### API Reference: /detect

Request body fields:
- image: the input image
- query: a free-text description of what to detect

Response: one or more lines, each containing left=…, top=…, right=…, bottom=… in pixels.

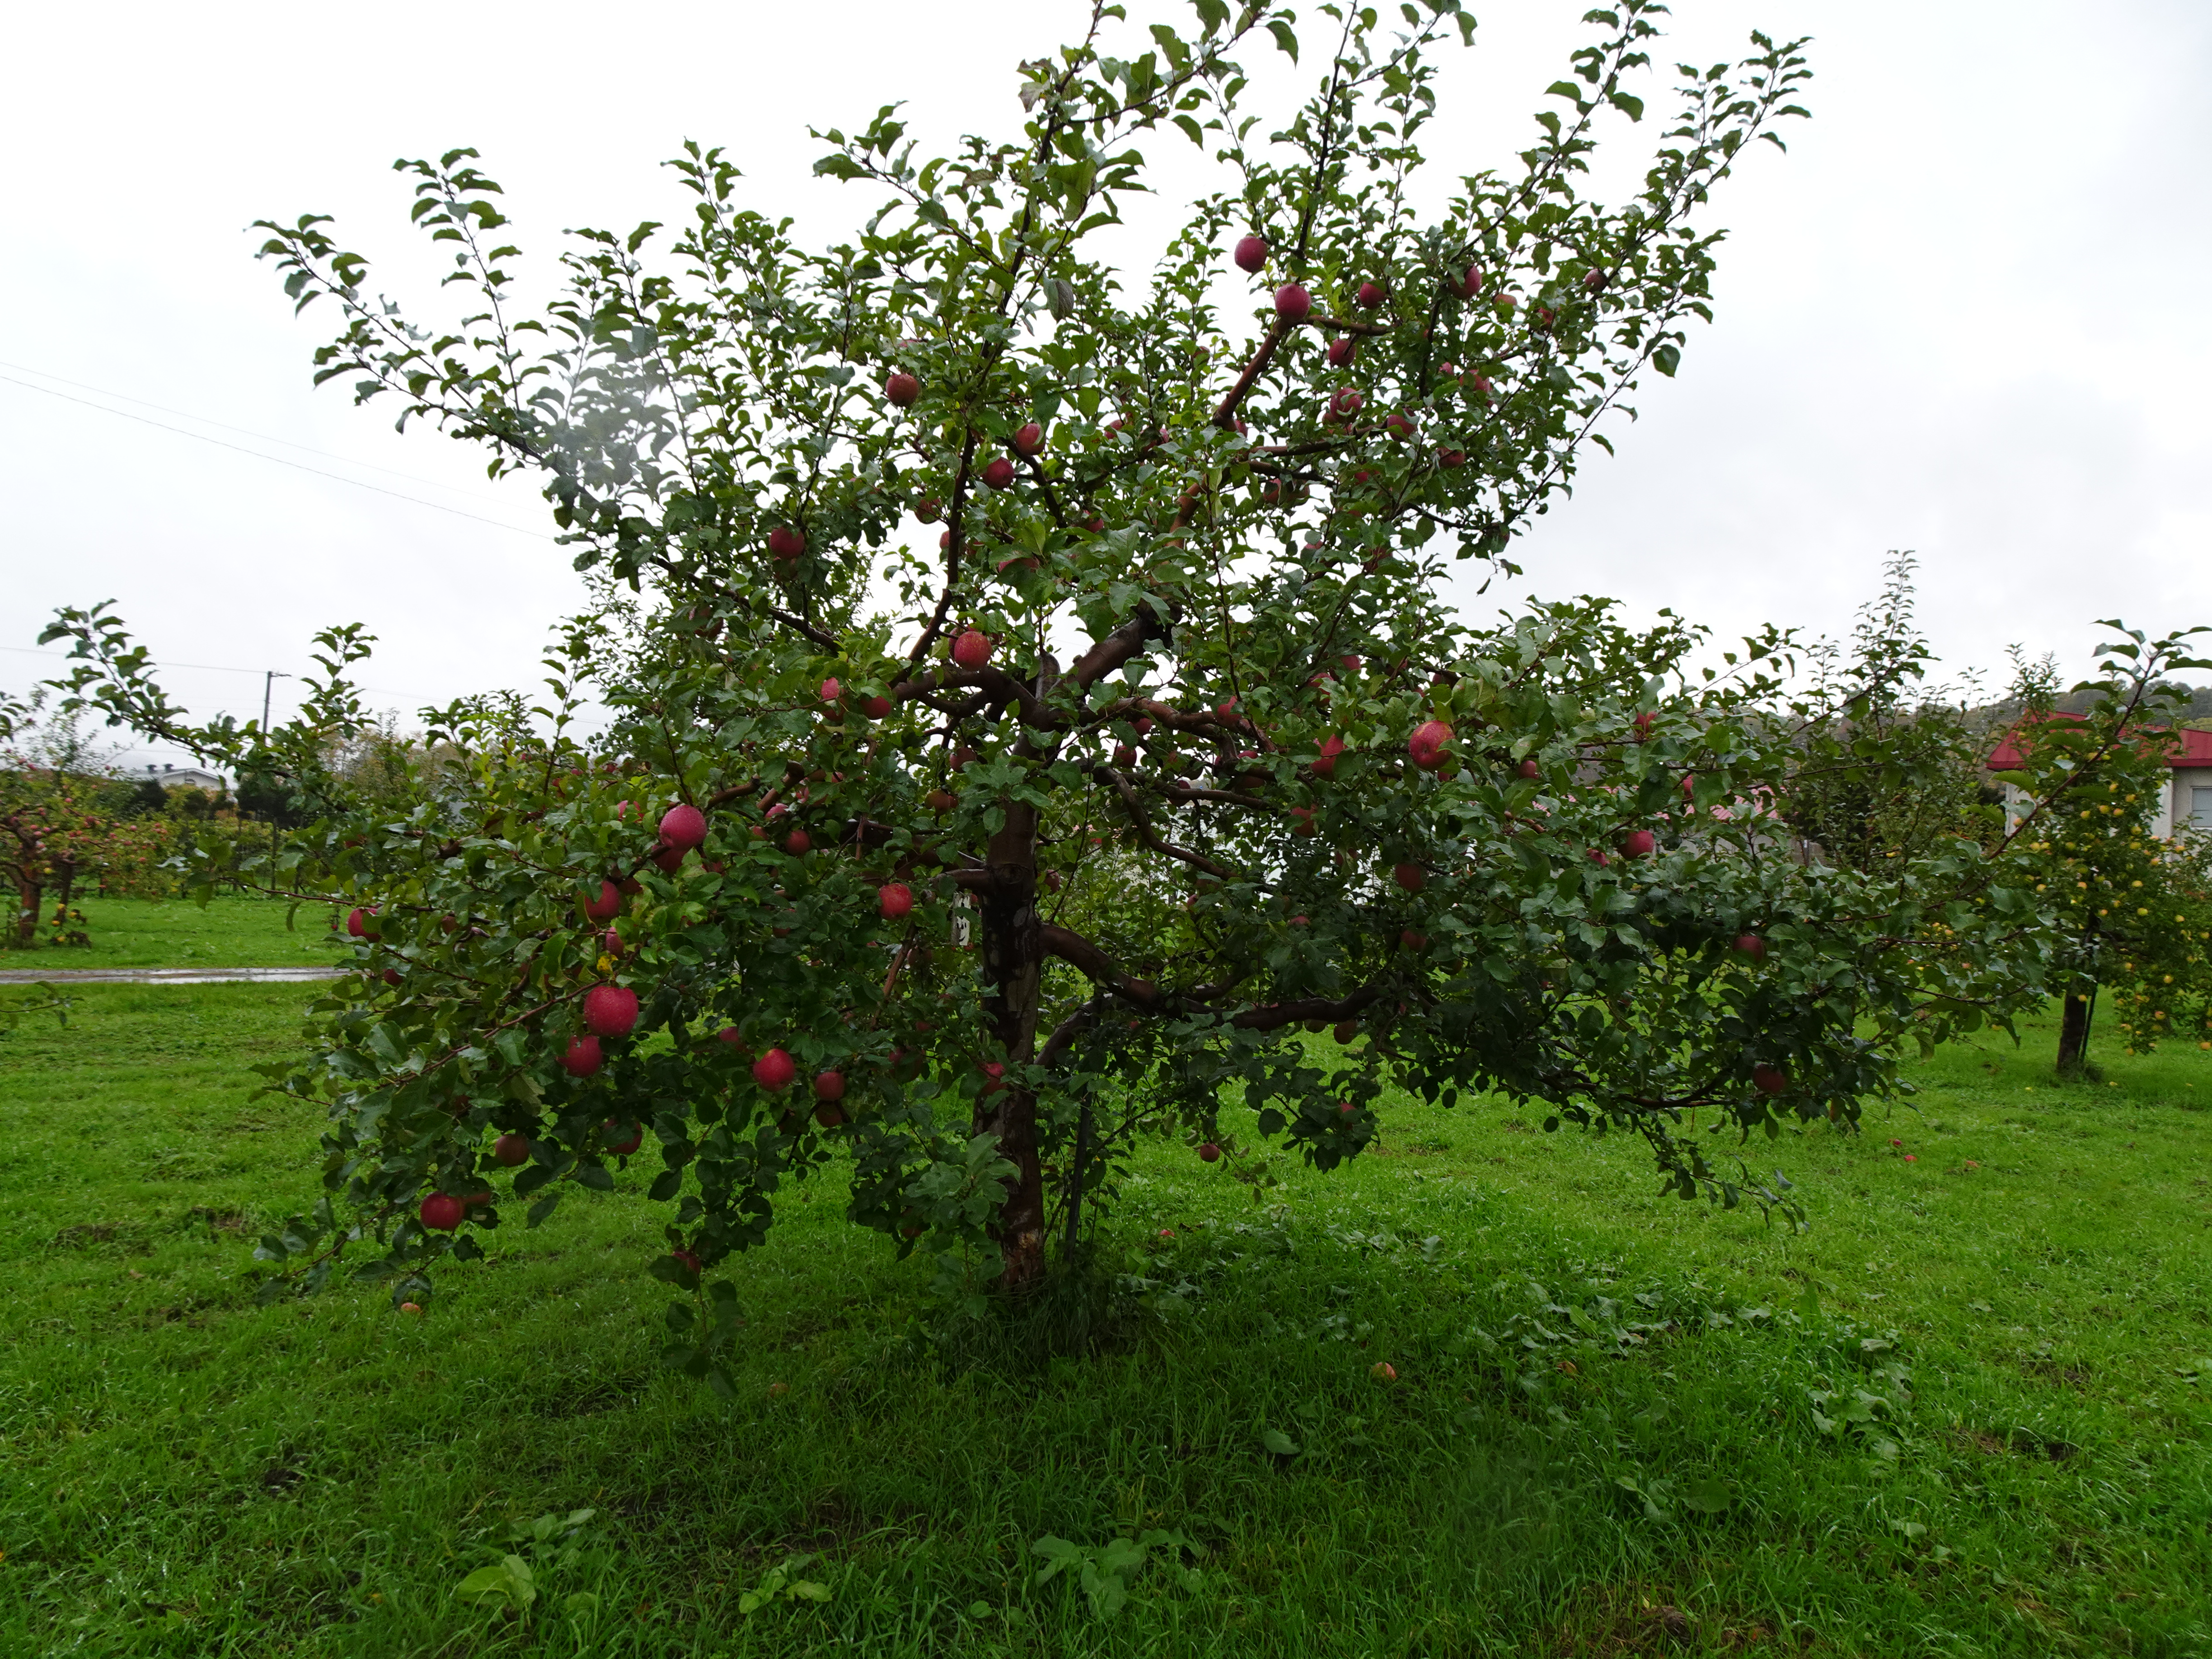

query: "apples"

left=1634, top=711, right=1658, bottom=734
left=1177, top=730, right=1199, bottom=748
left=700, top=851, right=723, bottom=873
left=1292, top=803, right=1318, bottom=838
left=1167, top=752, right=1183, bottom=772
left=1237, top=750, right=1258, bottom=759
left=1290, top=915, right=1310, bottom=925
left=1339, top=1103, right=1356, bottom=1130
left=1586, top=849, right=1610, bottom=868
left=1354, top=469, right=1379, bottom=485
left=1264, top=478, right=1281, bottom=504
left=977, top=1063, right=1008, bottom=1095
left=652, top=844, right=689, bottom=873
left=577, top=880, right=621, bottom=925
left=796, top=792, right=803, bottom=798
left=1216, top=704, right=1242, bottom=727
left=1396, top=863, right=1423, bottom=890
left=769, top=527, right=804, bottom=560
left=1328, top=338, right=1355, bottom=367
left=421, top=1191, right=465, bottom=1231
left=1168, top=780, right=1190, bottom=806
left=1437, top=447, right=1464, bottom=469
left=1359, top=282, right=1386, bottom=308
left=347, top=906, right=381, bottom=943
left=659, top=805, right=707, bottom=851
left=1228, top=695, right=1241, bottom=707
left=948, top=795, right=958, bottom=808
left=822, top=698, right=845, bottom=722
left=948, top=625, right=979, bottom=659
left=1401, top=660, right=1407, bottom=668
left=1494, top=294, right=1517, bottom=305
left=1539, top=307, right=1561, bottom=326
left=1130, top=1021, right=1139, bottom=1029
left=1428, top=361, right=1454, bottom=375
left=982, top=457, right=1014, bottom=490
left=949, top=747, right=976, bottom=773
left=1304, top=540, right=1325, bottom=564
left=496, top=1135, right=530, bottom=1167
left=785, top=829, right=811, bottom=857
left=1333, top=1023, right=1353, bottom=1044
left=1438, top=958, right=1462, bottom=975
left=772, top=926, right=790, bottom=938
left=616, top=800, right=644, bottom=823
left=1448, top=263, right=1482, bottom=300
left=940, top=531, right=950, bottom=549
left=1401, top=929, right=1426, bottom=951
left=858, top=683, right=891, bottom=720
left=1320, top=429, right=1333, bottom=441
left=1409, top=720, right=1455, bottom=770
left=1734, top=935, right=1764, bottom=964
left=898, top=340, right=918, bottom=348
left=888, top=1048, right=922, bottom=1085
left=384, top=969, right=403, bottom=986
left=765, top=803, right=788, bottom=818
left=901, top=1210, right=921, bottom=1239
left=1244, top=775, right=1264, bottom=788
left=1459, top=370, right=1490, bottom=395
left=1311, top=733, right=1349, bottom=782
left=1215, top=755, right=1221, bottom=765
left=1143, top=428, right=1168, bottom=453
left=1329, top=654, right=1359, bottom=681
left=939, top=993, right=951, bottom=1011
left=1075, top=510, right=1104, bottom=533
left=815, top=1103, right=841, bottom=1127
left=606, top=923, right=637, bottom=960
left=1518, top=760, right=1539, bottom=780
left=1275, top=284, right=1311, bottom=323
left=1234, top=237, right=1268, bottom=273
left=1330, top=388, right=1362, bottom=420
left=1369, top=546, right=1392, bottom=571
left=967, top=541, right=983, bottom=555
left=886, top=374, right=918, bottom=406
left=804, top=781, right=829, bottom=806
left=917, top=1021, right=930, bottom=1032
left=1037, top=869, right=1060, bottom=894
left=1585, top=269, right=1603, bottom=292
left=1387, top=408, right=1416, bottom=442
left=1015, top=423, right=1046, bottom=455
left=773, top=557, right=798, bottom=580
left=1304, top=1019, right=1325, bottom=1033
left=954, top=631, right=992, bottom=672
left=998, top=557, right=1038, bottom=573
left=1200, top=1143, right=1219, bottom=1162
left=914, top=498, right=942, bottom=524
left=878, top=883, right=912, bottom=920
left=1752, top=1063, right=1783, bottom=1093
left=1619, top=830, right=1654, bottom=861
left=694, top=606, right=723, bottom=640
left=821, top=677, right=845, bottom=699
left=1413, top=689, right=1434, bottom=714
left=1104, top=420, right=1123, bottom=440
left=990, top=633, right=1003, bottom=645
left=1336, top=848, right=1357, bottom=866
left=1682, top=774, right=1693, bottom=801
left=557, top=1035, right=602, bottom=1078
left=1344, top=424, right=1352, bottom=433
left=831, top=771, right=843, bottom=783
left=611, top=857, right=649, bottom=896
left=850, top=477, right=876, bottom=509
left=748, top=826, right=767, bottom=841
left=778, top=1109, right=795, bottom=1132
left=605, top=1118, right=642, bottom=1155
left=1437, top=771, right=1449, bottom=782
left=1116, top=745, right=1137, bottom=766
left=908, top=947, right=932, bottom=966
left=1307, top=672, right=1333, bottom=703
left=1335, top=508, right=1360, bottom=517
left=441, top=916, right=457, bottom=935
left=1235, top=419, right=1247, bottom=439
left=736, top=1044, right=756, bottom=1068
left=1187, top=894, right=1198, bottom=912
left=1322, top=411, right=1338, bottom=426
left=719, top=1028, right=739, bottom=1042
left=670, top=1252, right=701, bottom=1282
left=1130, top=717, right=1151, bottom=735
left=815, top=1072, right=845, bottom=1100
left=460, top=1193, right=490, bottom=1204
left=584, top=985, right=639, bottom=1038
left=808, top=769, right=825, bottom=781
left=1293, top=481, right=1310, bottom=498
left=753, top=1049, right=795, bottom=1093
left=1432, top=673, right=1451, bottom=687
left=925, top=789, right=950, bottom=816
left=1486, top=386, right=1494, bottom=409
